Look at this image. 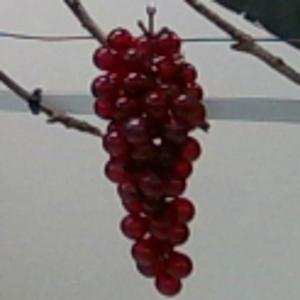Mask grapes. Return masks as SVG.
<instances>
[{"mask_svg": "<svg viewBox=\"0 0 300 300\" xmlns=\"http://www.w3.org/2000/svg\"><path fill=\"white\" fill-rule=\"evenodd\" d=\"M180 48L172 30L132 37L115 27L91 55L93 66L109 74L89 87L95 115L111 122L101 147L110 155L104 176L118 185L128 213L119 229L136 240L130 256L137 273L154 278L155 290L167 298L178 296L194 271L191 258L174 248L188 240L187 224L197 213L192 199L180 198L202 153L189 132L208 119L197 71L183 62Z\"/></svg>", "mask_w": 300, "mask_h": 300, "instance_id": "obj_1", "label": "grapes"}]
</instances>
